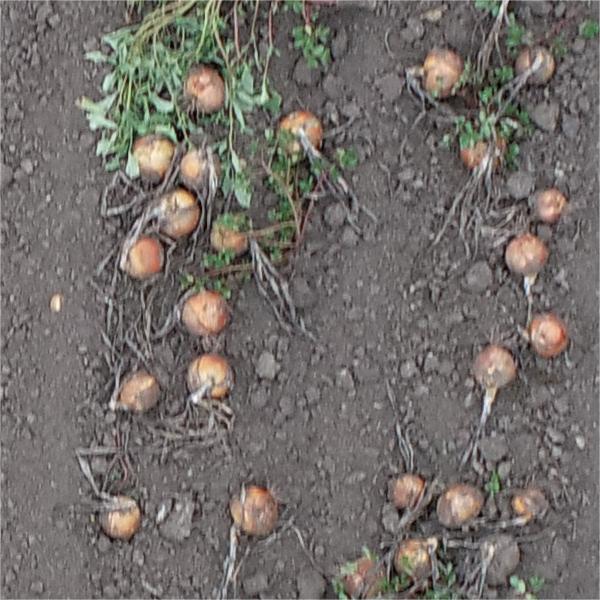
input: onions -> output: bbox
[341,557,384,598]
[419,48,463,95]
[115,369,160,411]
[186,354,231,397]
[217,225,248,254]
[484,537,520,578]
[176,148,211,184]
[457,139,495,173]
[123,238,162,277]
[230,484,276,533]
[526,312,567,355]
[437,484,481,525]
[470,344,517,394]
[503,234,547,276]
[183,64,225,113]
[154,187,198,236]
[387,472,424,507]
[98,495,139,538]
[515,46,554,82]
[179,288,230,334]
[393,537,435,578]
[130,134,174,178]
[276,109,321,152]
[530,186,566,223]
[508,488,542,518]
